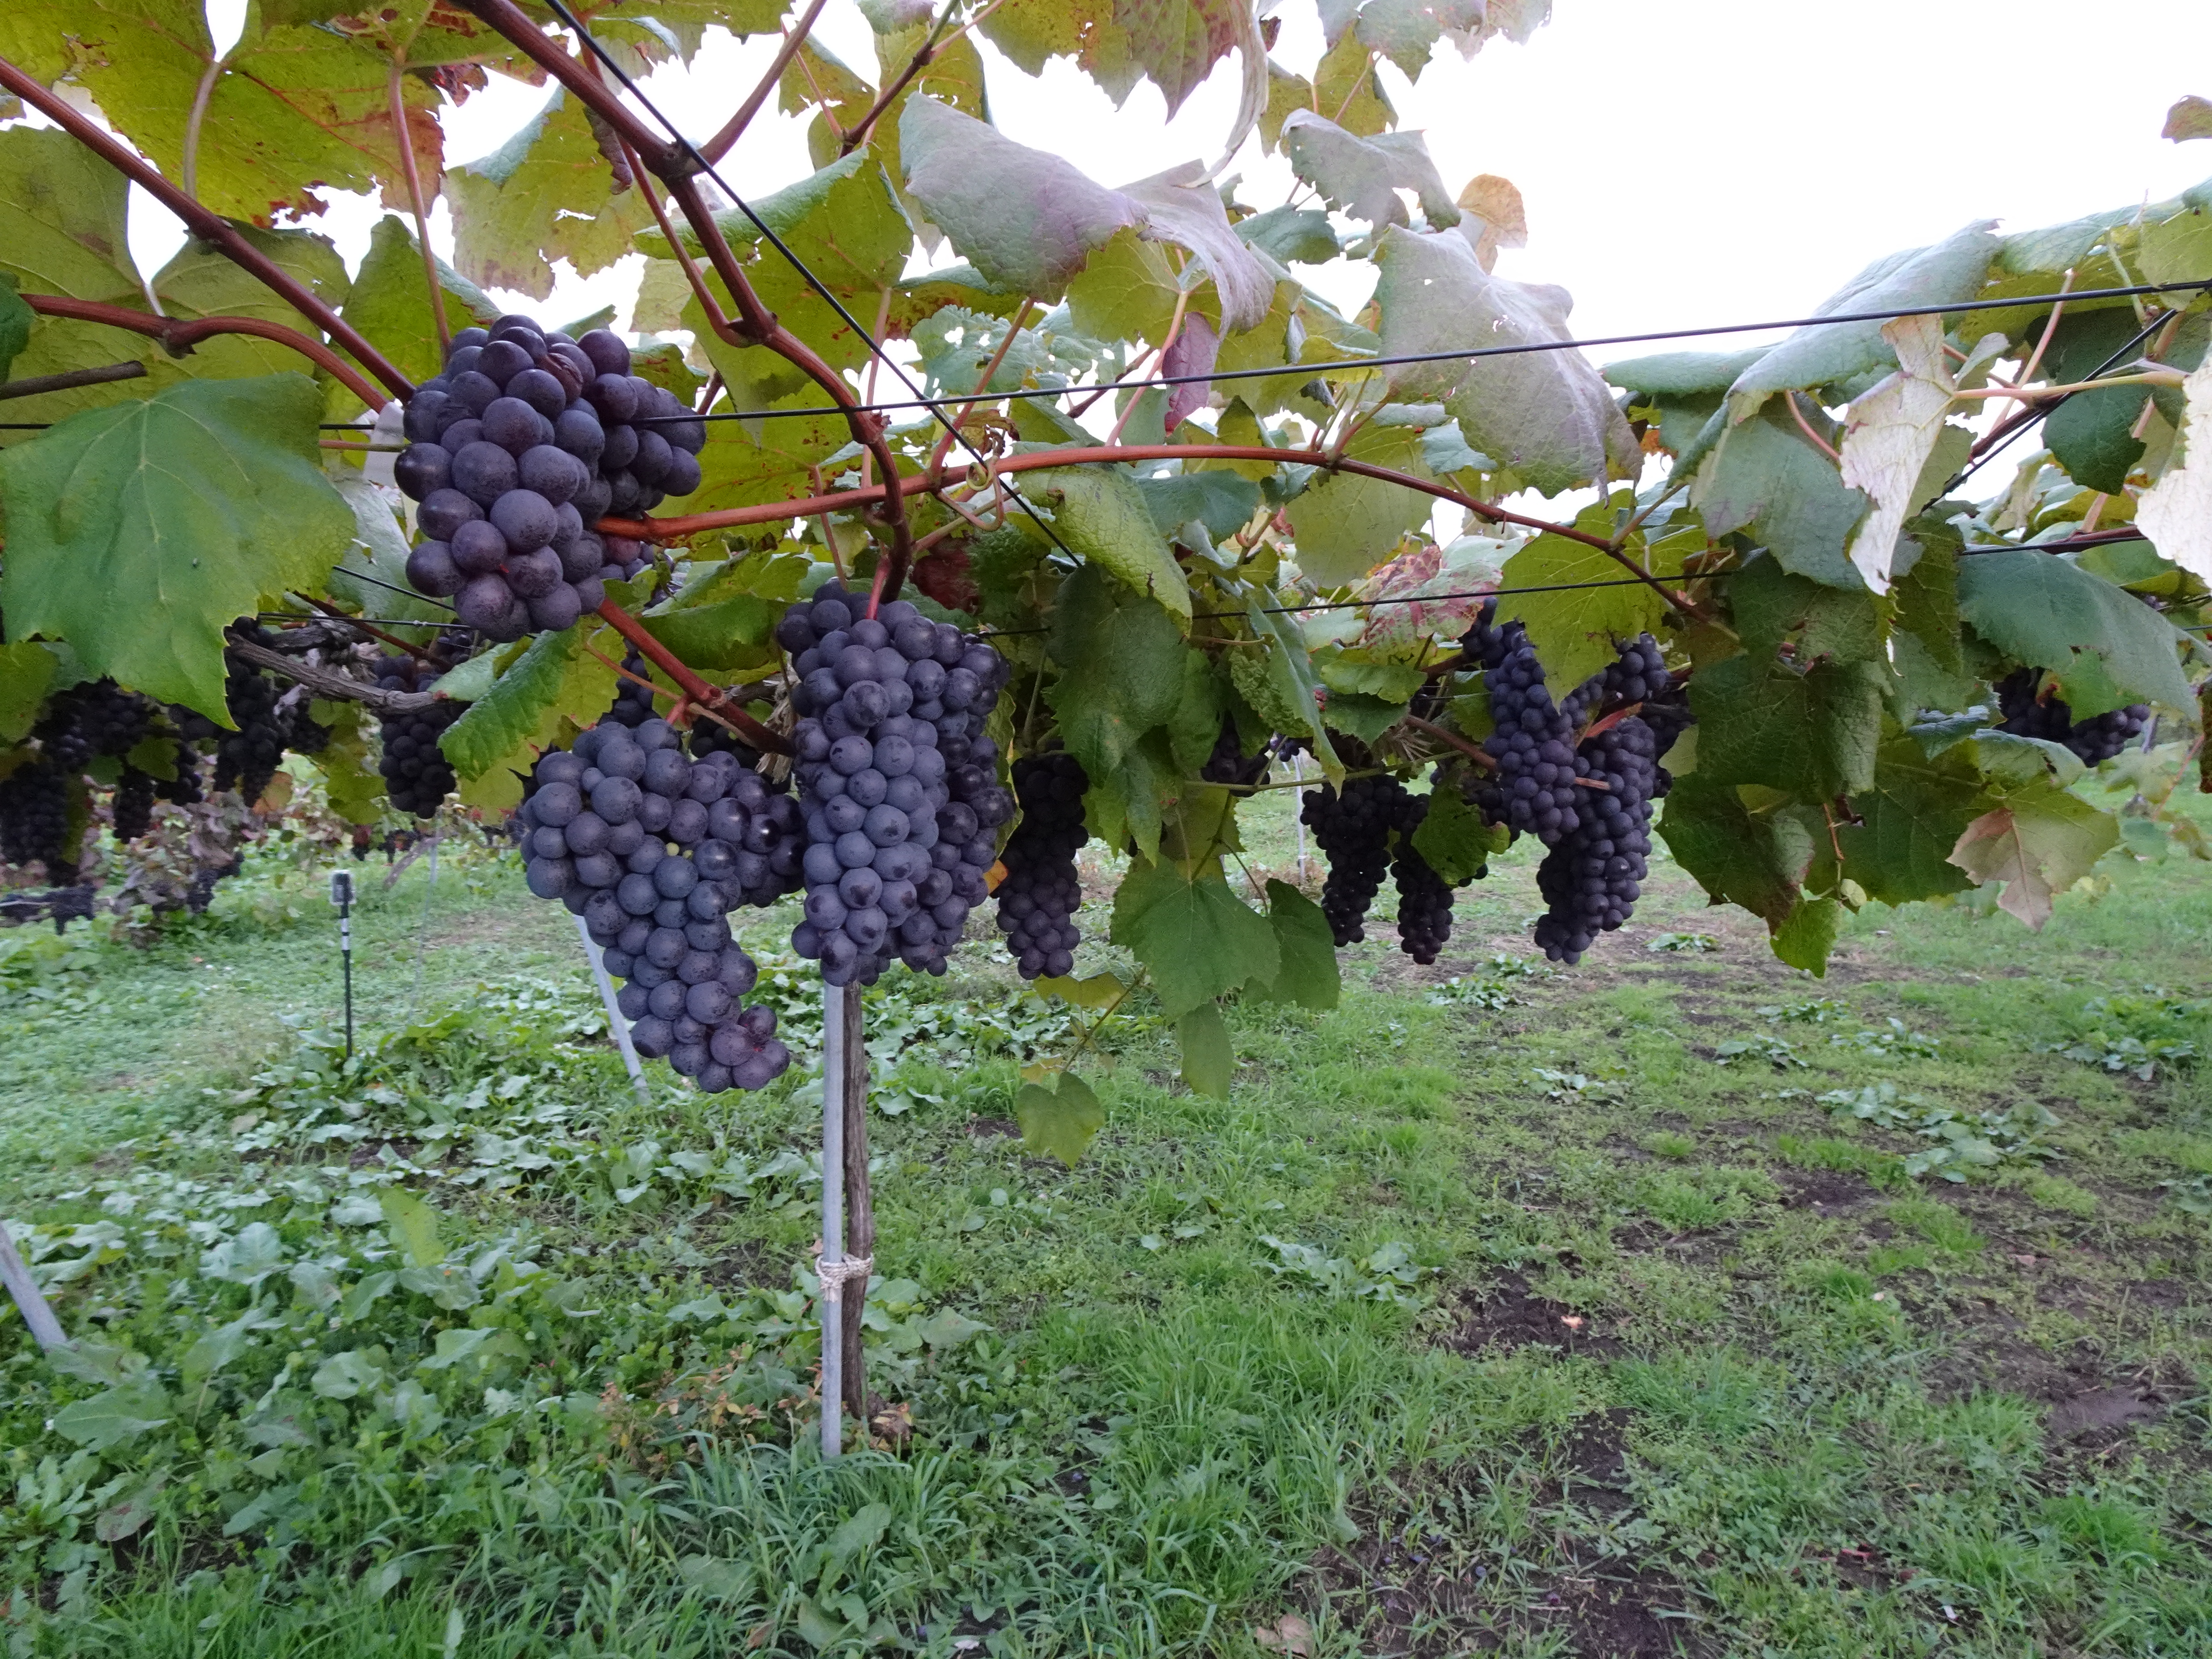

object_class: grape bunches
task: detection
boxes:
[365,656,463,819]
[1404,676,1454,725]
[2073,707,2143,767]
[1388,784,1478,968]
[393,314,710,643]
[775,582,947,988]
[182,860,218,911]
[502,715,793,1094]
[1997,663,2068,744]
[168,701,236,759]
[1053,1464,1102,1507]
[2197,676,2212,802]
[1302,774,1391,952]
[1451,634,1588,845]
[1641,686,1707,797]
[2143,589,2179,619]
[49,783,95,937]
[50,692,98,773]
[1321,719,1387,767]
[1210,726,1274,790]
[903,1619,983,1647]
[217,847,251,882]
[606,636,654,723]
[111,753,157,848]
[231,665,292,812]
[1452,594,1530,665]
[879,590,1008,975]
[97,686,157,749]
[1530,716,1657,966]
[990,749,1091,980]
[282,682,350,735]
[153,732,207,807]
[0,762,73,867]
[1273,730,1309,762]
[1583,629,1677,707]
